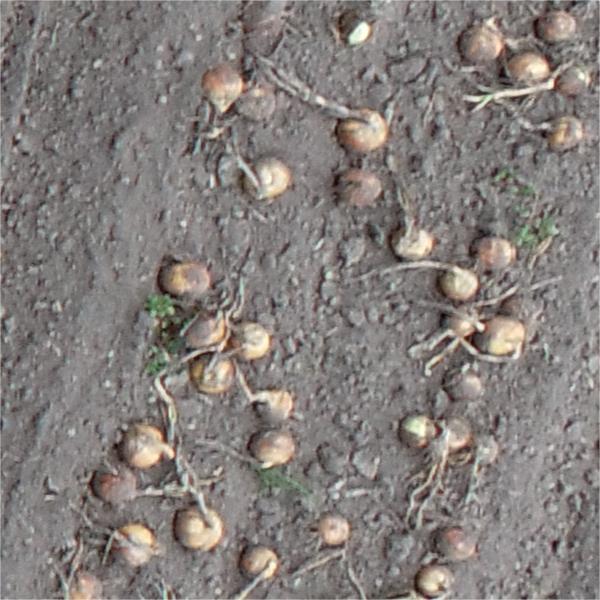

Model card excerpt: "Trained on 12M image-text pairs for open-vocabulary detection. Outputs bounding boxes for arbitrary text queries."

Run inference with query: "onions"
[542,113,579,151]
[317,513,348,544]
[240,543,278,578]
[92,467,134,500]
[509,49,549,86]
[339,108,386,153]
[338,167,383,207]
[451,371,481,399]
[399,412,432,446]
[555,62,586,97]
[439,266,476,301]
[447,309,477,335]
[412,563,448,595]
[190,352,236,393]
[67,570,99,599]
[112,520,155,563]
[247,389,289,427]
[474,234,514,272]
[250,428,293,467]
[174,506,221,547]
[478,315,522,357]
[459,20,503,65]
[238,84,275,122]
[233,321,270,358]
[200,67,241,108]
[121,423,167,468]
[394,223,432,259]
[475,437,496,464]
[434,524,472,561]
[437,415,470,452]
[161,259,210,297]
[536,7,575,42]
[247,158,290,200]
[185,312,225,349]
